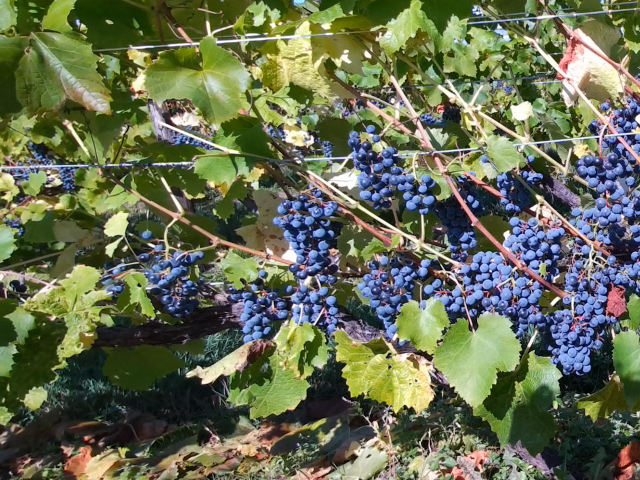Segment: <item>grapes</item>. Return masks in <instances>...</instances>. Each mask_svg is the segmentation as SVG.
Wrapping results in <instances>:
<instances>
[{
	"label": "grapes",
	"mask_w": 640,
	"mask_h": 480,
	"mask_svg": "<svg viewBox=\"0 0 640 480\" xmlns=\"http://www.w3.org/2000/svg\"><path fill=\"white\" fill-rule=\"evenodd\" d=\"M103 267L111 271V273L105 274L103 278L100 280L102 285H106L109 282H113L115 280L116 275H119L122 271L127 269V264L125 262H120L116 267L112 261H105L103 263Z\"/></svg>",
	"instance_id": "11"
},
{
	"label": "grapes",
	"mask_w": 640,
	"mask_h": 480,
	"mask_svg": "<svg viewBox=\"0 0 640 480\" xmlns=\"http://www.w3.org/2000/svg\"><path fill=\"white\" fill-rule=\"evenodd\" d=\"M629 107H618L613 110L615 115L608 120V123L617 132L636 130L639 123L635 121L636 116L640 114V106L637 105V99L632 96L626 98Z\"/></svg>",
	"instance_id": "9"
},
{
	"label": "grapes",
	"mask_w": 640,
	"mask_h": 480,
	"mask_svg": "<svg viewBox=\"0 0 640 480\" xmlns=\"http://www.w3.org/2000/svg\"><path fill=\"white\" fill-rule=\"evenodd\" d=\"M227 300L229 302H238L242 299L245 303L243 312L240 314V320L245 322L241 327L242 341L251 343L267 337L271 333V324L273 316L276 319H285L289 316L288 301L283 297H278L276 291H270L264 296L258 297L256 293L250 290L240 289L236 286L227 288Z\"/></svg>",
	"instance_id": "6"
},
{
	"label": "grapes",
	"mask_w": 640,
	"mask_h": 480,
	"mask_svg": "<svg viewBox=\"0 0 640 480\" xmlns=\"http://www.w3.org/2000/svg\"><path fill=\"white\" fill-rule=\"evenodd\" d=\"M204 257L205 252L203 250L192 251L189 254L184 251H175L171 259H164L162 253H157L155 255L157 262L152 264V268H147L144 271V276L148 278L150 283L158 284V286L150 288V293L152 295L163 294L161 304L166 306V312L174 319H181L183 316L191 315L199 306V301L197 299L188 300L186 297L173 299L169 295L171 293L169 285H174L178 277L181 281L180 294L182 296H195L197 287L187 272L189 265Z\"/></svg>",
	"instance_id": "4"
},
{
	"label": "grapes",
	"mask_w": 640,
	"mask_h": 480,
	"mask_svg": "<svg viewBox=\"0 0 640 480\" xmlns=\"http://www.w3.org/2000/svg\"><path fill=\"white\" fill-rule=\"evenodd\" d=\"M340 206L333 200L325 202L324 206L313 204L307 195H298L296 200H282L278 203L277 213L284 217H275L273 224L282 227L284 239L291 243V249L296 263L289 265L290 272L298 280L315 276L319 270L328 266L325 274L318 276L320 284L335 285L337 283V266L332 264L329 257V241L334 238V231L328 229L331 226L329 219L316 220L331 217ZM293 211H307L311 215L303 213L288 214Z\"/></svg>",
	"instance_id": "2"
},
{
	"label": "grapes",
	"mask_w": 640,
	"mask_h": 480,
	"mask_svg": "<svg viewBox=\"0 0 640 480\" xmlns=\"http://www.w3.org/2000/svg\"><path fill=\"white\" fill-rule=\"evenodd\" d=\"M458 190L460 191L464 202L471 212L474 211V213L478 215H482L484 213L486 207L483 205V200L480 198V195L477 191L464 193L462 188H459Z\"/></svg>",
	"instance_id": "10"
},
{
	"label": "grapes",
	"mask_w": 640,
	"mask_h": 480,
	"mask_svg": "<svg viewBox=\"0 0 640 480\" xmlns=\"http://www.w3.org/2000/svg\"><path fill=\"white\" fill-rule=\"evenodd\" d=\"M496 180L497 190L506 196L500 199V204L503 205L504 210L521 213L523 206L528 207L532 204L531 193L510 173L497 175Z\"/></svg>",
	"instance_id": "8"
},
{
	"label": "grapes",
	"mask_w": 640,
	"mask_h": 480,
	"mask_svg": "<svg viewBox=\"0 0 640 480\" xmlns=\"http://www.w3.org/2000/svg\"><path fill=\"white\" fill-rule=\"evenodd\" d=\"M573 241L578 245L571 247L569 252L571 254L582 253V260L587 261L589 258V253L591 251V247L588 246L585 242H583L578 236L573 238Z\"/></svg>",
	"instance_id": "12"
},
{
	"label": "grapes",
	"mask_w": 640,
	"mask_h": 480,
	"mask_svg": "<svg viewBox=\"0 0 640 480\" xmlns=\"http://www.w3.org/2000/svg\"><path fill=\"white\" fill-rule=\"evenodd\" d=\"M283 291L292 293L289 297V303L292 305L290 307V319L294 322L301 320L303 323H315L317 321L322 310L321 298L329 294L327 286L319 287L317 290H309L307 284H302L298 291H294L292 284H285ZM324 304L329 307L327 313L317 321V326L319 328L326 326V332L333 334L338 326L339 304L337 303V297L335 295L326 297Z\"/></svg>",
	"instance_id": "7"
},
{
	"label": "grapes",
	"mask_w": 640,
	"mask_h": 480,
	"mask_svg": "<svg viewBox=\"0 0 640 480\" xmlns=\"http://www.w3.org/2000/svg\"><path fill=\"white\" fill-rule=\"evenodd\" d=\"M106 290L110 292V299L115 301L117 299L116 294H121L125 290V286L123 284L111 283L106 287Z\"/></svg>",
	"instance_id": "14"
},
{
	"label": "grapes",
	"mask_w": 640,
	"mask_h": 480,
	"mask_svg": "<svg viewBox=\"0 0 640 480\" xmlns=\"http://www.w3.org/2000/svg\"><path fill=\"white\" fill-rule=\"evenodd\" d=\"M596 255H597V256H599V257H596V258H595V261H596V262H599V261H600V258H603V257H604V255H603V254H601V253H599L598 251L596 252Z\"/></svg>",
	"instance_id": "16"
},
{
	"label": "grapes",
	"mask_w": 640,
	"mask_h": 480,
	"mask_svg": "<svg viewBox=\"0 0 640 480\" xmlns=\"http://www.w3.org/2000/svg\"><path fill=\"white\" fill-rule=\"evenodd\" d=\"M359 133L351 130L348 134L347 145L354 151L352 160L357 169L362 173L357 175V187L361 189L358 196L364 201H373V208L379 210L389 208L391 202L389 200L378 202L382 197H391L394 194L392 187H397L399 192L404 193L403 199L405 209L410 212L418 210L420 216L428 215L429 212L438 217L443 227L448 226V243L450 244L449 252L451 258L460 264H465L469 259L470 251L475 249L478 241L476 240L475 229L471 226L470 218L462 211L459 202L455 197L448 199L445 203L436 202L435 195H425L428 190H433L437 185V181L430 174H424L420 177L422 184L417 186V192L420 195L407 193L414 190L413 175H399V173H408V168L393 166V158L398 152L396 147H383L381 149L382 162L373 165V171H370V165L366 161H373L377 157L375 151H370L372 145L368 141L362 144L358 140ZM617 138L603 140L602 149L609 148V143H613L614 148L607 154V161L601 156L584 155L576 160L577 174L588 182L590 188H596L598 193L609 191V198L615 201L607 208V200L604 197H598L595 200V206L586 209L584 212L580 208H573L571 215L573 217H581L577 222L571 218L569 222L579 229L586 237L592 240L594 234L592 228L587 224L588 219L597 221L600 225H610V229L605 234V229L600 227L597 232V239L600 243H604L607 247L614 245L616 249L624 251L628 246V252L631 254L632 261H626L623 265L618 264L614 267L608 266L596 272L589 279H581L580 271L583 269V262L575 260L570 267V273L565 275L564 284L568 292H573L575 296L574 302L575 314L582 316L573 330H570L573 323L572 311L570 309L558 310L552 315H543L538 301L541 299L543 290L539 281H535L530 285L531 277L524 273L522 276L517 271H513L514 265L508 263L505 265L504 258L497 252L479 251L474 254L470 260V264H465L460 269L463 277L462 285L465 288L466 296H462V289L455 285L451 295H442L435 292L436 289L442 290L444 285L440 278H434L430 283H426L422 292L427 295H433L435 300L442 302L444 310L451 313H464L468 305H475L481 302L482 313L490 312L494 309L502 316H508L513 323L512 329L516 336H521L529 324L536 325L539 331H543L550 327V336L553 343L560 348H554L552 344H548L546 349L551 351V363L553 365L561 364V372L564 375H572L575 373L579 377H584L592 369V360L589 357L592 349L600 351L603 348V342L596 337H603L606 334L604 325L614 324L617 321L615 316L604 315V305L607 302V295L612 283L615 286L627 285L632 287L637 293H640V262H633L640 258V227L633 224L630 232L633 234L632 239L620 240L616 238L625 235L626 229L618 223L624 220V216L633 219L640 216V192L635 191L632 198L626 197L623 188L616 179L626 177L624 185L633 188L637 184V179L631 173L640 174V165L634 166L636 161L631 154L624 149ZM385 167L390 168V173H383L381 178L375 173H381ZM515 280V286L511 288L509 283H504L499 289L492 291L493 296H485V290L493 289L497 284L506 282L509 275ZM515 296H520L518 302L509 305Z\"/></svg>",
	"instance_id": "1"
},
{
	"label": "grapes",
	"mask_w": 640,
	"mask_h": 480,
	"mask_svg": "<svg viewBox=\"0 0 640 480\" xmlns=\"http://www.w3.org/2000/svg\"><path fill=\"white\" fill-rule=\"evenodd\" d=\"M365 131L369 134H374L372 136V141L374 143H378L380 141V136L375 134L377 132L376 125L374 123H370L366 126Z\"/></svg>",
	"instance_id": "15"
},
{
	"label": "grapes",
	"mask_w": 640,
	"mask_h": 480,
	"mask_svg": "<svg viewBox=\"0 0 640 480\" xmlns=\"http://www.w3.org/2000/svg\"><path fill=\"white\" fill-rule=\"evenodd\" d=\"M517 173L522 176L528 184L531 186H535L539 180L543 179L542 172L528 171V170H518Z\"/></svg>",
	"instance_id": "13"
},
{
	"label": "grapes",
	"mask_w": 640,
	"mask_h": 480,
	"mask_svg": "<svg viewBox=\"0 0 640 480\" xmlns=\"http://www.w3.org/2000/svg\"><path fill=\"white\" fill-rule=\"evenodd\" d=\"M388 257L384 256L378 260H372L368 264L370 274L363 276V282L357 284V289L361 291L364 298H368L369 307L376 308V317L384 325L385 336L389 339L397 332V325L394 323L393 312H399L403 303H407L414 298L412 292L417 288L415 278L426 279L428 268L432 265L430 258H423L420 266L416 268L411 264H401L399 259L389 260V274L393 276V285L383 282L389 280L386 271L379 272L380 265H386Z\"/></svg>",
	"instance_id": "3"
},
{
	"label": "grapes",
	"mask_w": 640,
	"mask_h": 480,
	"mask_svg": "<svg viewBox=\"0 0 640 480\" xmlns=\"http://www.w3.org/2000/svg\"><path fill=\"white\" fill-rule=\"evenodd\" d=\"M509 225L514 227L513 235L504 240V246L511 251L520 250V260L534 273H538L539 264L544 263L545 280L553 282L559 275V268L554 263L560 259L561 237L566 231L562 228H552L549 233L540 231L537 219L526 222L519 217H511Z\"/></svg>",
	"instance_id": "5"
}]
</instances>
